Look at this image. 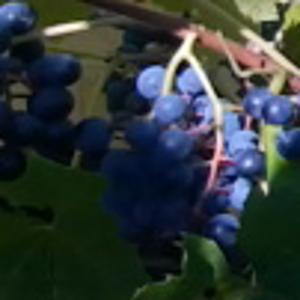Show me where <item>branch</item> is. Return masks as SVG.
<instances>
[{
	"instance_id": "obj_1",
	"label": "branch",
	"mask_w": 300,
	"mask_h": 300,
	"mask_svg": "<svg viewBox=\"0 0 300 300\" xmlns=\"http://www.w3.org/2000/svg\"><path fill=\"white\" fill-rule=\"evenodd\" d=\"M88 3L91 6H100L119 12L123 17L134 22L164 29L168 35L181 39L191 36L195 45L230 56L255 71H261L271 65V59L266 54L233 42L193 19L178 15L172 17L162 15L147 6L128 0H88Z\"/></svg>"
}]
</instances>
